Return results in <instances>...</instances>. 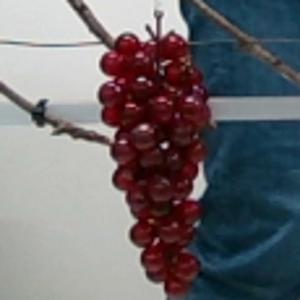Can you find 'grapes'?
I'll use <instances>...</instances> for the list:
<instances>
[{"instance_id": "01657485", "label": "grapes", "mask_w": 300, "mask_h": 300, "mask_svg": "<svg viewBox=\"0 0 300 300\" xmlns=\"http://www.w3.org/2000/svg\"><path fill=\"white\" fill-rule=\"evenodd\" d=\"M99 67L114 77L98 91L105 125L117 128L109 154L118 163L111 175L136 222L129 231L143 248L139 262L146 277L167 296L187 295L202 264L187 246L196 236L204 209L190 199L198 163L216 147L210 91L199 69L187 62L191 47L170 32L161 42L124 32Z\"/></svg>"}]
</instances>
